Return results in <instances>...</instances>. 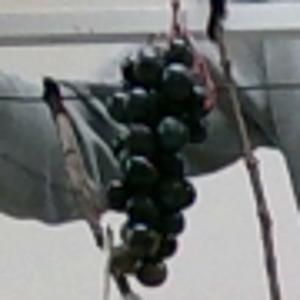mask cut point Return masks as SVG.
<instances>
[{"label":"cut point","mask_w":300,"mask_h":300,"mask_svg":"<svg viewBox=\"0 0 300 300\" xmlns=\"http://www.w3.org/2000/svg\"><path fill=\"white\" fill-rule=\"evenodd\" d=\"M168 7L171 10L172 18V36L181 35V27L178 19V14L182 7V0H169Z\"/></svg>","instance_id":"cut-point-1"}]
</instances>
